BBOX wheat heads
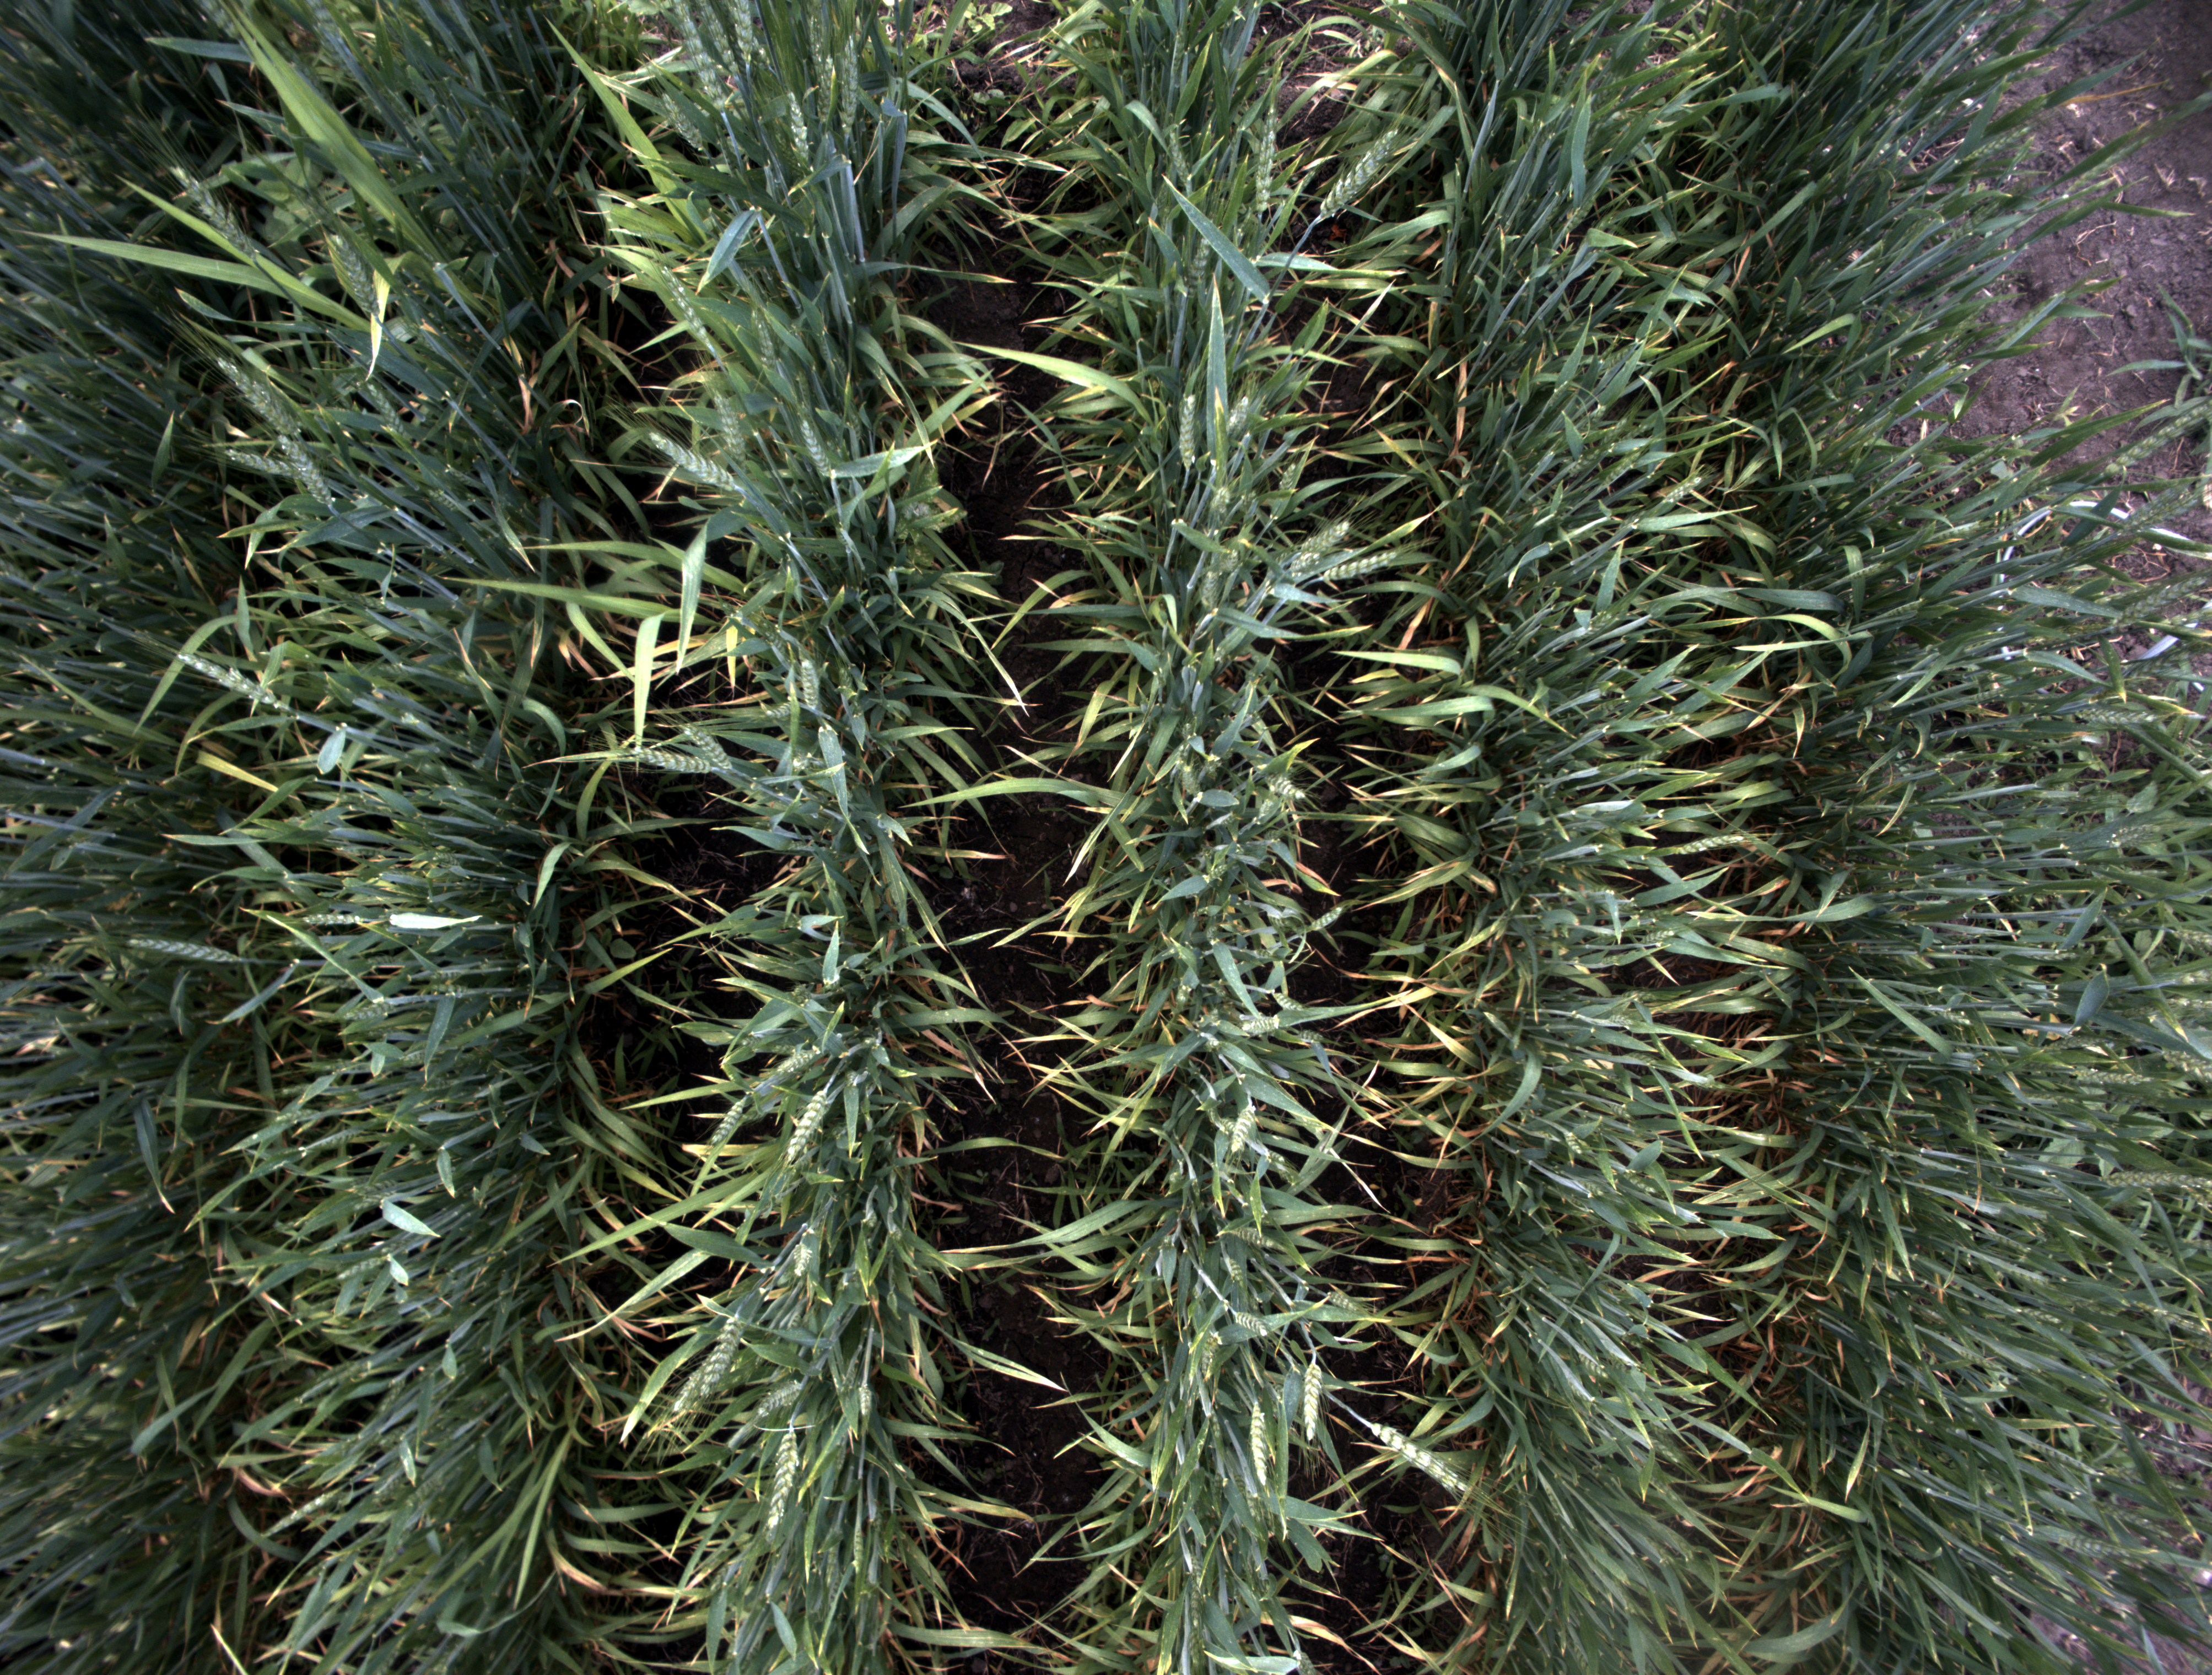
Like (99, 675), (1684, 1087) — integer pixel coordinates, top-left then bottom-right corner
(354, 1518), (390, 1547)
(741, 1640), (760, 1669)
(1249, 1292), (1260, 1311)
(1864, 806), (1896, 814)
(751, 37), (772, 69)
(1919, 107), (1949, 146)
(860, 1385), (872, 1418)
(173, 651), (281, 707)
(1617, 901), (1637, 912)
(774, 1049), (817, 1075)
(832, 354), (848, 376)
(753, 1336), (779, 1370)
(710, 1563), (731, 1592)
(2069, 623), (2105, 635)
(1643, 1534), (1668, 1557)
(2074, 1069), (2156, 1085)
(2030, 1441), (2098, 1475)
(766, 1433), (800, 1529)
(1649, 712), (1691, 725)
(1230, 1106), (1256, 1152)
(1201, 1334), (1219, 1373)
(2026, 1093), (2077, 1105)
(1303, 1364), (1322, 1441)
(364, 954), (396, 966)
(346, 847), (377, 858)
(380, 1375), (407, 1412)
(2124, 486), (2177, 523)
(126, 936), (242, 962)
(1961, 458), (2002, 482)
(1619, 422), (1650, 442)
(2097, 1497), (2173, 1541)
(1623, 1169), (1655, 1193)
(1564, 194), (1596, 235)
(1647, 1433), (1678, 1461)
(2191, 1191), (2212, 1212)
(1295, 1650), (1316, 1675)
(1549, 380), (1570, 408)
(2008, 1267), (2058, 1291)
(351, 1176), (395, 1193)
(1215, 986), (1227, 997)
(771, 1043), (797, 1053)
(1602, 954), (1619, 965)
(368, 1026), (402, 1038)
(1278, 462), (1296, 490)
(0, 559), (31, 582)
(741, 1035), (762, 1048)
(281, 1083), (312, 1095)
(844, 1071), (858, 1087)
(1326, 1288), (1357, 1311)
(2064, 135), (2152, 195)
(1960, 125), (2031, 163)
(649, 429), (737, 492)
(22, 963), (74, 974)
(170, 166), (254, 254)
(421, 1078), (456, 1093)
(1174, 27), (1186, 72)
(2104, 402), (2211, 477)
(1277, 1168), (1294, 1186)
(1221, 1117), (1236, 1131)
(1268, 914), (1294, 932)
(1229, 1257), (1244, 1288)
(658, 261), (708, 342)
(837, 34), (859, 135)
(1212, 1408), (1221, 1439)
(1169, 130), (1191, 182)
(1241, 208), (1252, 230)
(378, 1422), (413, 1446)
(1613, 510), (1644, 535)
(426, 488), (459, 512)
(1962, 440), (2000, 471)
(374, 1635), (405, 1673)
(399, 1051), (423, 1063)
(430, 971), (461, 982)
(301, 913), (365, 927)
(1189, 715), (1197, 737)
(724, 0), (753, 65)
(867, 1211), (876, 1229)
(1185, 237), (1210, 300)
(1620, 1333), (1643, 1348)
(722, 1064), (737, 1081)
(1218, 548), (1239, 574)
(1319, 129), (1400, 219)
(1213, 646), (1228, 662)
(709, 1095), (746, 1146)
(1628, 1051), (1656, 1064)
(2110, 577), (2208, 628)
(796, 990), (812, 1008)
(1300, 520), (1350, 558)
(1289, 553), (1321, 572)
(1595, 931), (1614, 937)
(337, 1257), (385, 1279)
(336, 232), (382, 316)
(1234, 1225), (1276, 1249)
(1232, 1467), (1245, 1496)
(711, 387), (746, 468)
(1663, 477), (1703, 502)
(1545, 1482), (1557, 1508)
(307, 1128), (361, 1151)
(1568, 447), (1601, 473)
(355, 96), (386, 122)
(1850, 560), (1881, 580)
(1638, 909), (1670, 921)
(297, 186), (341, 231)
(1243, 489), (1258, 511)
(1565, 1133), (1582, 1154)
(1208, 864), (1230, 881)
(2064, 1294), (2116, 1319)
(765, 630), (786, 655)
(1258, 798), (1274, 818)
(1298, 1028), (1324, 1042)
(1582, 611), (1613, 638)
(853, 1526), (863, 1571)
(2106, 824), (2159, 848)
(2172, 993), (2212, 1012)
(791, 742), (797, 760)
(715, 121), (737, 173)
(2049, 1034), (2116, 1051)
(1576, 404), (1606, 431)
(1207, 1107), (1216, 1123)
(2184, 1338), (2212, 1354)
(793, 1157), (809, 1173)
(314, 975), (361, 991)
(763, 621), (783, 639)
(1608, 1014), (1632, 1026)
(373, 660), (408, 676)
(1230, 116), (1245, 152)
(693, 0), (740, 77)
(808, 14), (826, 83)
(1219, 813), (1237, 826)
(1267, 1148), (1285, 1165)
(1579, 1352), (1609, 1380)
(441, 765), (459, 786)
(364, 382), (413, 444)
(196, 0), (242, 39)
(659, 90), (704, 151)
(1610, 1352), (1628, 1373)
(327, 1362), (360, 1387)
(799, 416), (833, 478)
(785, 1087), (828, 1157)
(751, 308), (777, 368)
(830, 1579), (841, 1605)
(1567, 1377), (1591, 1403)
(2123, 1005), (2155, 1019)
(1179, 1160), (1183, 1175)
(787, 88), (809, 163)
(1537, 120), (1556, 151)
(2064, 1532), (2131, 1558)
(850, 411), (862, 442)
(1297, 169), (1315, 192)
(386, 868), (422, 878)
(1182, 764), (1199, 797)
(382, 684), (411, 699)
(1189, 1552), (1204, 1585)
(895, 1225), (902, 1242)
(757, 1381), (803, 1417)
(678, 724), (733, 770)
(303, 0), (342, 40)
(406, 320), (435, 352)
(819, 330), (830, 359)
(1602, 345), (1634, 369)
(1201, 570), (1219, 612)
(1256, 102), (1278, 211)
(1207, 756), (1218, 781)
(264, 1491), (334, 1537)
(1192, 1179), (1202, 1197)
(1584, 130), (1597, 162)
(2117, 491), (2199, 542)
(1187, 1629), (1206, 1667)
(431, 1648), (451, 1674)
(2015, 951), (2077, 961)
(1195, 908), (1206, 917)
(1607, 1103), (1632, 1120)
(1156, 168), (1171, 212)
(1959, 1350), (2002, 1371)
(337, 792), (381, 813)
(2161, 1046), (2211, 1080)
(1985, 300), (2051, 350)
(1937, 1007), (1971, 1025)
(772, 119), (806, 181)
(1210, 487), (1230, 516)
(435, 849), (460, 865)
(406, 1473), (439, 1509)
(1545, 193), (1564, 222)
(675, 1), (726, 111)
(1677, 836), (1744, 856)
(2102, 1466), (2186, 1490)
(1578, 1178), (1606, 1197)
(1601, 416), (1629, 445)
(1939, 333), (1978, 366)
(223, 448), (300, 479)
(2125, 637), (2209, 685)
(1265, 773), (1306, 801)
(339, 589), (387, 610)
(1169, 1172), (1177, 1184)
(1323, 552), (1397, 583)
(1255, 949), (1272, 959)
(372, 1473), (403, 1505)
(1204, 848), (1214, 861)
(1621, 990), (1656, 1002)
(382, 86), (417, 126)
(1206, 925), (1218, 942)
(2011, 1306), (2061, 1324)
(1234, 1310), (1268, 1337)
(2039, 1184), (2066, 1197)
(1163, 1233), (1176, 1244)
(764, 699), (791, 721)
(1263, 828), (1282, 841)
(1154, 663), (1167, 687)
(835, 1444), (846, 1470)
(1989, 1231), (2029, 1252)
(2173, 925), (2211, 956)
(1649, 1474), (1676, 1499)
(802, 657), (820, 709)
(793, 1245), (812, 1276)
(699, 1316), (742, 1398)
(1189, 1588), (1203, 1628)
(1886, 600), (1921, 617)
(673, 1346), (720, 1411)
(417, 243), (437, 265)
(316, 1360), (351, 1380)
(344, 999), (393, 1021)
(1943, 199), (1998, 247)
(634, 746), (710, 773)
(2133, 1299), (2209, 1337)
(2102, 1091), (2167, 1109)
(1178, 394), (1198, 469)
(353, 1190), (397, 1210)
(1253, 1495), (1265, 1521)
(1590, 75), (1625, 114)
(380, 1233), (415, 1255)
(1601, 452), (1641, 486)
(1648, 1418), (1684, 1458)
(2075, 708), (2156, 727)
(2128, 870), (2167, 879)
(322, 1060), (367, 1074)
(1246, 1487), (1257, 1517)
(791, 984), (805, 998)
(214, 354), (301, 436)
(1203, 1039), (1220, 1050)
(1902, 212), (1933, 236)
(1213, 1473), (1223, 1500)
(1226, 397), (1249, 435)
(445, 465), (473, 488)
(797, 367), (812, 407)
(1599, 347), (1615, 358)
(1178, 743), (1187, 762)
(1241, 1017), (1277, 1033)
(790, 1307), (803, 1329)
(1590, 886), (1615, 895)
(1856, 243), (1881, 266)
(1177, 985), (1189, 1002)
(280, 1145), (298, 1155)
(276, 431), (333, 505)
(840, 1366), (855, 1395)
(1971, 688), (2009, 701)
(1271, 991), (1303, 1010)
(816, 53), (834, 124)
(1370, 1421), (1468, 1493)
(279, 38), (333, 105)
(1666, 1529), (1692, 1556)
(1591, 698), (1625, 712)
(2172, 967), (2211, 986)
(1311, 907), (1342, 932)
(1274, 552), (1289, 564)
(786, 839), (805, 850)
(1602, 826), (1619, 835)
(1951, 300), (1987, 338)
(1190, 1285), (1199, 1298)
(1524, 118), (1540, 154)
(1666, 663), (1692, 676)
(430, 984), (470, 995)
(1574, 1642), (1590, 1672)
(1934, 524), (1981, 540)
(0, 646), (47, 671)
(1631, 749), (1663, 769)
(838, 529), (850, 549)
(838, 664), (853, 690)
(1642, 929), (1675, 944)
(2106, 1170), (2211, 1191)
(275, 1109), (322, 1122)
(1212, 1007), (1220, 1024)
